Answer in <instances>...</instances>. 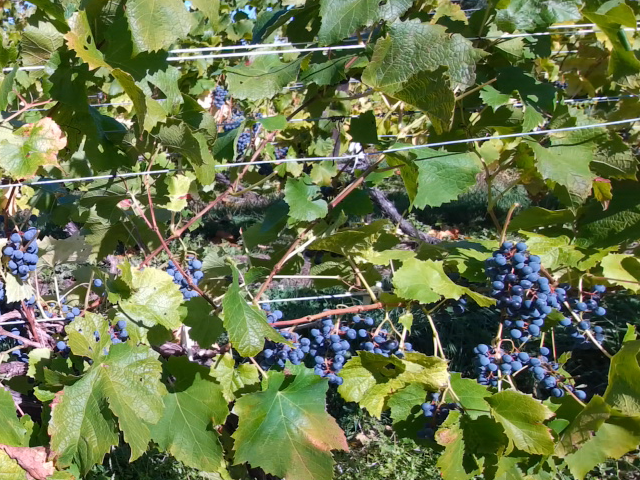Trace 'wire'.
<instances>
[{
	"label": "wire",
	"mask_w": 640,
	"mask_h": 480,
	"mask_svg": "<svg viewBox=\"0 0 640 480\" xmlns=\"http://www.w3.org/2000/svg\"><path fill=\"white\" fill-rule=\"evenodd\" d=\"M640 123V117L634 119H626V120H611V121H603L595 124H586L583 126H574L567 128H546V129H538V130H526L520 132H513L507 134H496L485 137H476V138H463V139H454L444 142H429V143H420L410 146L398 147L393 149H381L374 150L369 152H360L351 155H329V156H315V157H276L264 160H248V161H236L233 163H219L215 165L216 169L221 168H235L238 166H250V165H266L273 163H291V162H318V161H331V160H353L359 159L362 157H371V156H379L383 154H395L400 152L412 151L422 148H431V147H446L456 144H465V143H478V142H487L498 139H509L515 137H522L528 135H540V134H557V133H569L576 131H585L589 129H597L605 126H613V125H628V124H636Z\"/></svg>",
	"instance_id": "1"
},
{
	"label": "wire",
	"mask_w": 640,
	"mask_h": 480,
	"mask_svg": "<svg viewBox=\"0 0 640 480\" xmlns=\"http://www.w3.org/2000/svg\"><path fill=\"white\" fill-rule=\"evenodd\" d=\"M368 44H327L312 48H286L273 51H242L237 53H224L218 55H204L194 57H167V62H197L206 60H220L226 58H239L244 56H275L288 53H315L316 51L329 49H368Z\"/></svg>",
	"instance_id": "2"
},
{
	"label": "wire",
	"mask_w": 640,
	"mask_h": 480,
	"mask_svg": "<svg viewBox=\"0 0 640 480\" xmlns=\"http://www.w3.org/2000/svg\"><path fill=\"white\" fill-rule=\"evenodd\" d=\"M193 167H175L169 169H157L152 171H128V172H120V173H105L101 175H85L80 177H65L58 179H50V180H35V181H25V182H13L9 184L0 183V189H12L16 187H28V186H38V185H52V184H60L67 182H82L87 180H103L107 178H122V177H131V176H154L159 174H171L177 172H193Z\"/></svg>",
	"instance_id": "3"
},
{
	"label": "wire",
	"mask_w": 640,
	"mask_h": 480,
	"mask_svg": "<svg viewBox=\"0 0 640 480\" xmlns=\"http://www.w3.org/2000/svg\"><path fill=\"white\" fill-rule=\"evenodd\" d=\"M600 23H586V24H551L546 23V29H575V30H545V31H529V32H520L515 34H492V35H483L476 37H468V42H478L485 40H494V39H517L522 37H531V36H547V35H577V34H606V29H595L600 28Z\"/></svg>",
	"instance_id": "4"
},
{
	"label": "wire",
	"mask_w": 640,
	"mask_h": 480,
	"mask_svg": "<svg viewBox=\"0 0 640 480\" xmlns=\"http://www.w3.org/2000/svg\"><path fill=\"white\" fill-rule=\"evenodd\" d=\"M312 45V41L308 40L305 42H259L252 44H243V45H233V46H212L205 48H174L169 49V54L176 53H207L214 51H235V50H245V49H254L261 47H308Z\"/></svg>",
	"instance_id": "5"
}]
</instances>
